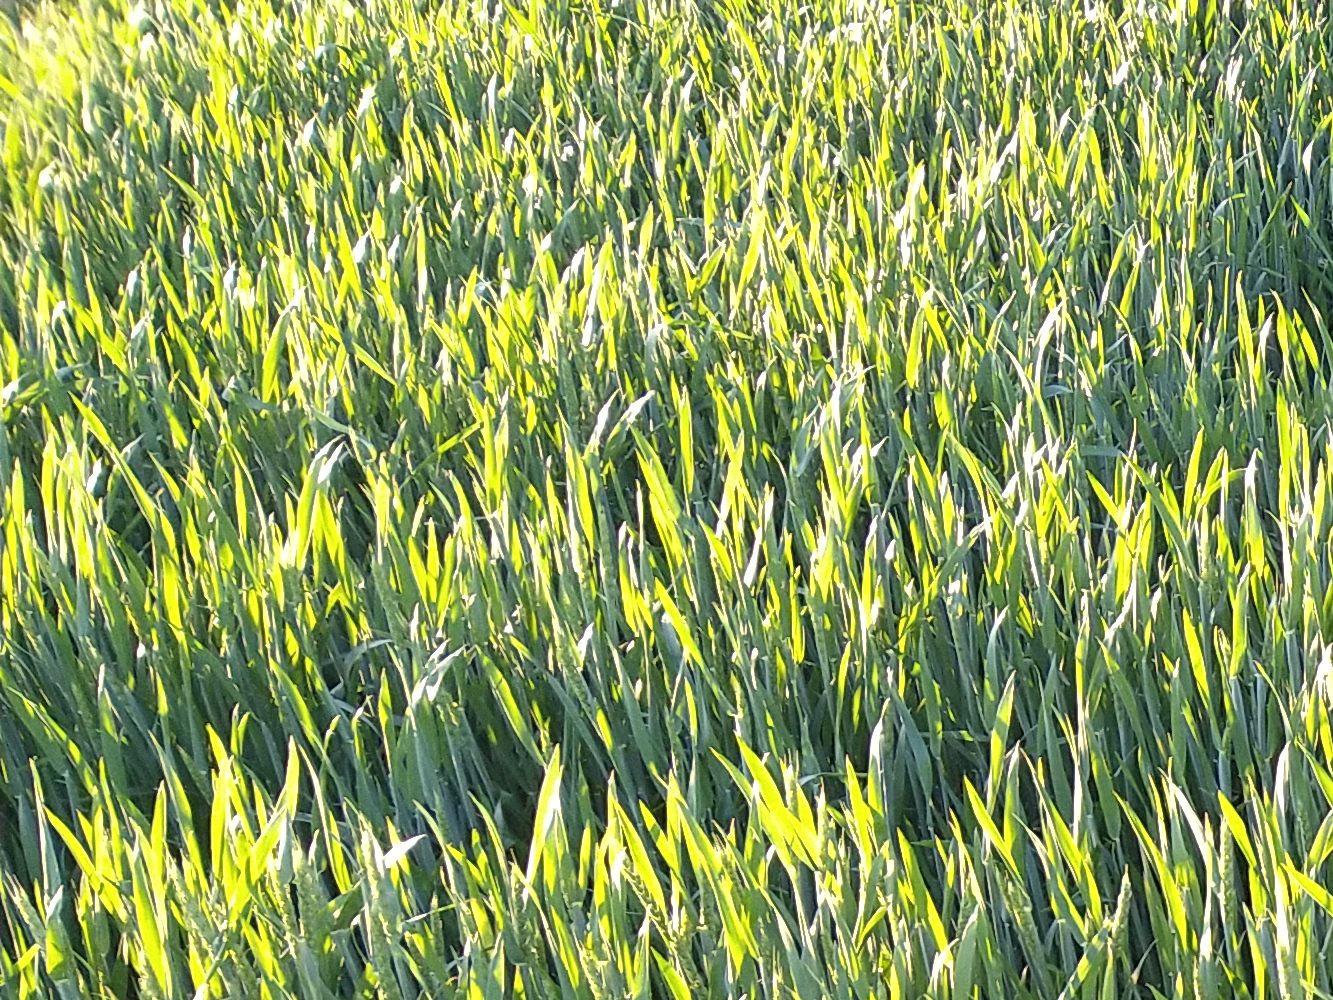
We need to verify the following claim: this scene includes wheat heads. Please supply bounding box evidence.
[541,974,573,1000]
[1297,803,1314,852]
[93,644,134,715]
[406,937,431,988]
[1232,391,1240,432]
[955,888,972,948]
[821,927,835,965]
[791,467,804,506]
[1194,972,1218,1000]
[713,555,730,604]
[536,932,549,973]
[1221,640,1232,671]
[913,410,933,463]
[17,893,44,946]
[461,901,476,938]
[511,872,531,956]
[108,457,125,502]
[786,766,798,811]
[72,682,103,753]
[1222,723,1230,757]
[438,797,453,844]
[1112,683,1125,721]
[139,159,154,186]
[1278,940,1307,1000]
[267,678,295,733]
[1219,816,1236,928]
[1062,395,1075,442]
[1007,880,1040,963]
[1017,550,1038,612]
[758,326,766,358]
[809,593,826,659]
[171,861,212,940]
[450,696,472,750]
[227,580,234,632]
[560,875,574,920]
[772,973,787,1000]
[660,366,674,414]
[1252,747,1267,772]
[288,561,303,600]
[421,323,431,376]
[883,700,894,758]
[369,919,403,1000]
[203,576,219,617]
[701,860,716,928]
[578,946,628,1000]
[732,676,751,734]
[1042,543,1049,581]
[560,358,580,432]
[183,560,197,595]
[294,855,318,953]
[1262,624,1273,668]
[44,559,71,615]
[864,382,886,438]
[1105,424,1114,466]
[916,354,924,389]
[669,732,685,786]
[11,590,55,667]
[1213,568,1220,604]
[1111,871,1131,963]
[951,615,966,670]
[817,796,828,858]
[1171,308,1179,365]
[361,831,399,947]
[58,920,82,990]
[436,698,455,740]
[924,233,947,293]
[576,535,593,613]
[768,632,776,690]
[82,637,98,678]
[1199,539,1213,585]
[668,920,712,1000]
[930,511,944,548]
[871,641,890,694]
[1177,573,1188,604]
[126,595,147,647]
[718,849,743,895]
[632,283,648,337]
[962,345,972,397]
[234,343,250,370]
[1280,221,1291,263]
[1270,428,1278,466]
[273,880,301,960]
[209,156,219,188]
[553,630,589,707]
[564,320,587,375]
[372,562,404,650]
[802,472,814,523]
[712,635,724,682]
[1078,462,1089,501]
[1152,393,1188,461]
[138,954,169,1000]
[179,746,212,800]
[224,928,258,999]
[869,426,896,477]
[597,511,617,612]
[620,855,668,940]
[760,932,773,968]
[431,902,444,957]
[1215,402,1225,436]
